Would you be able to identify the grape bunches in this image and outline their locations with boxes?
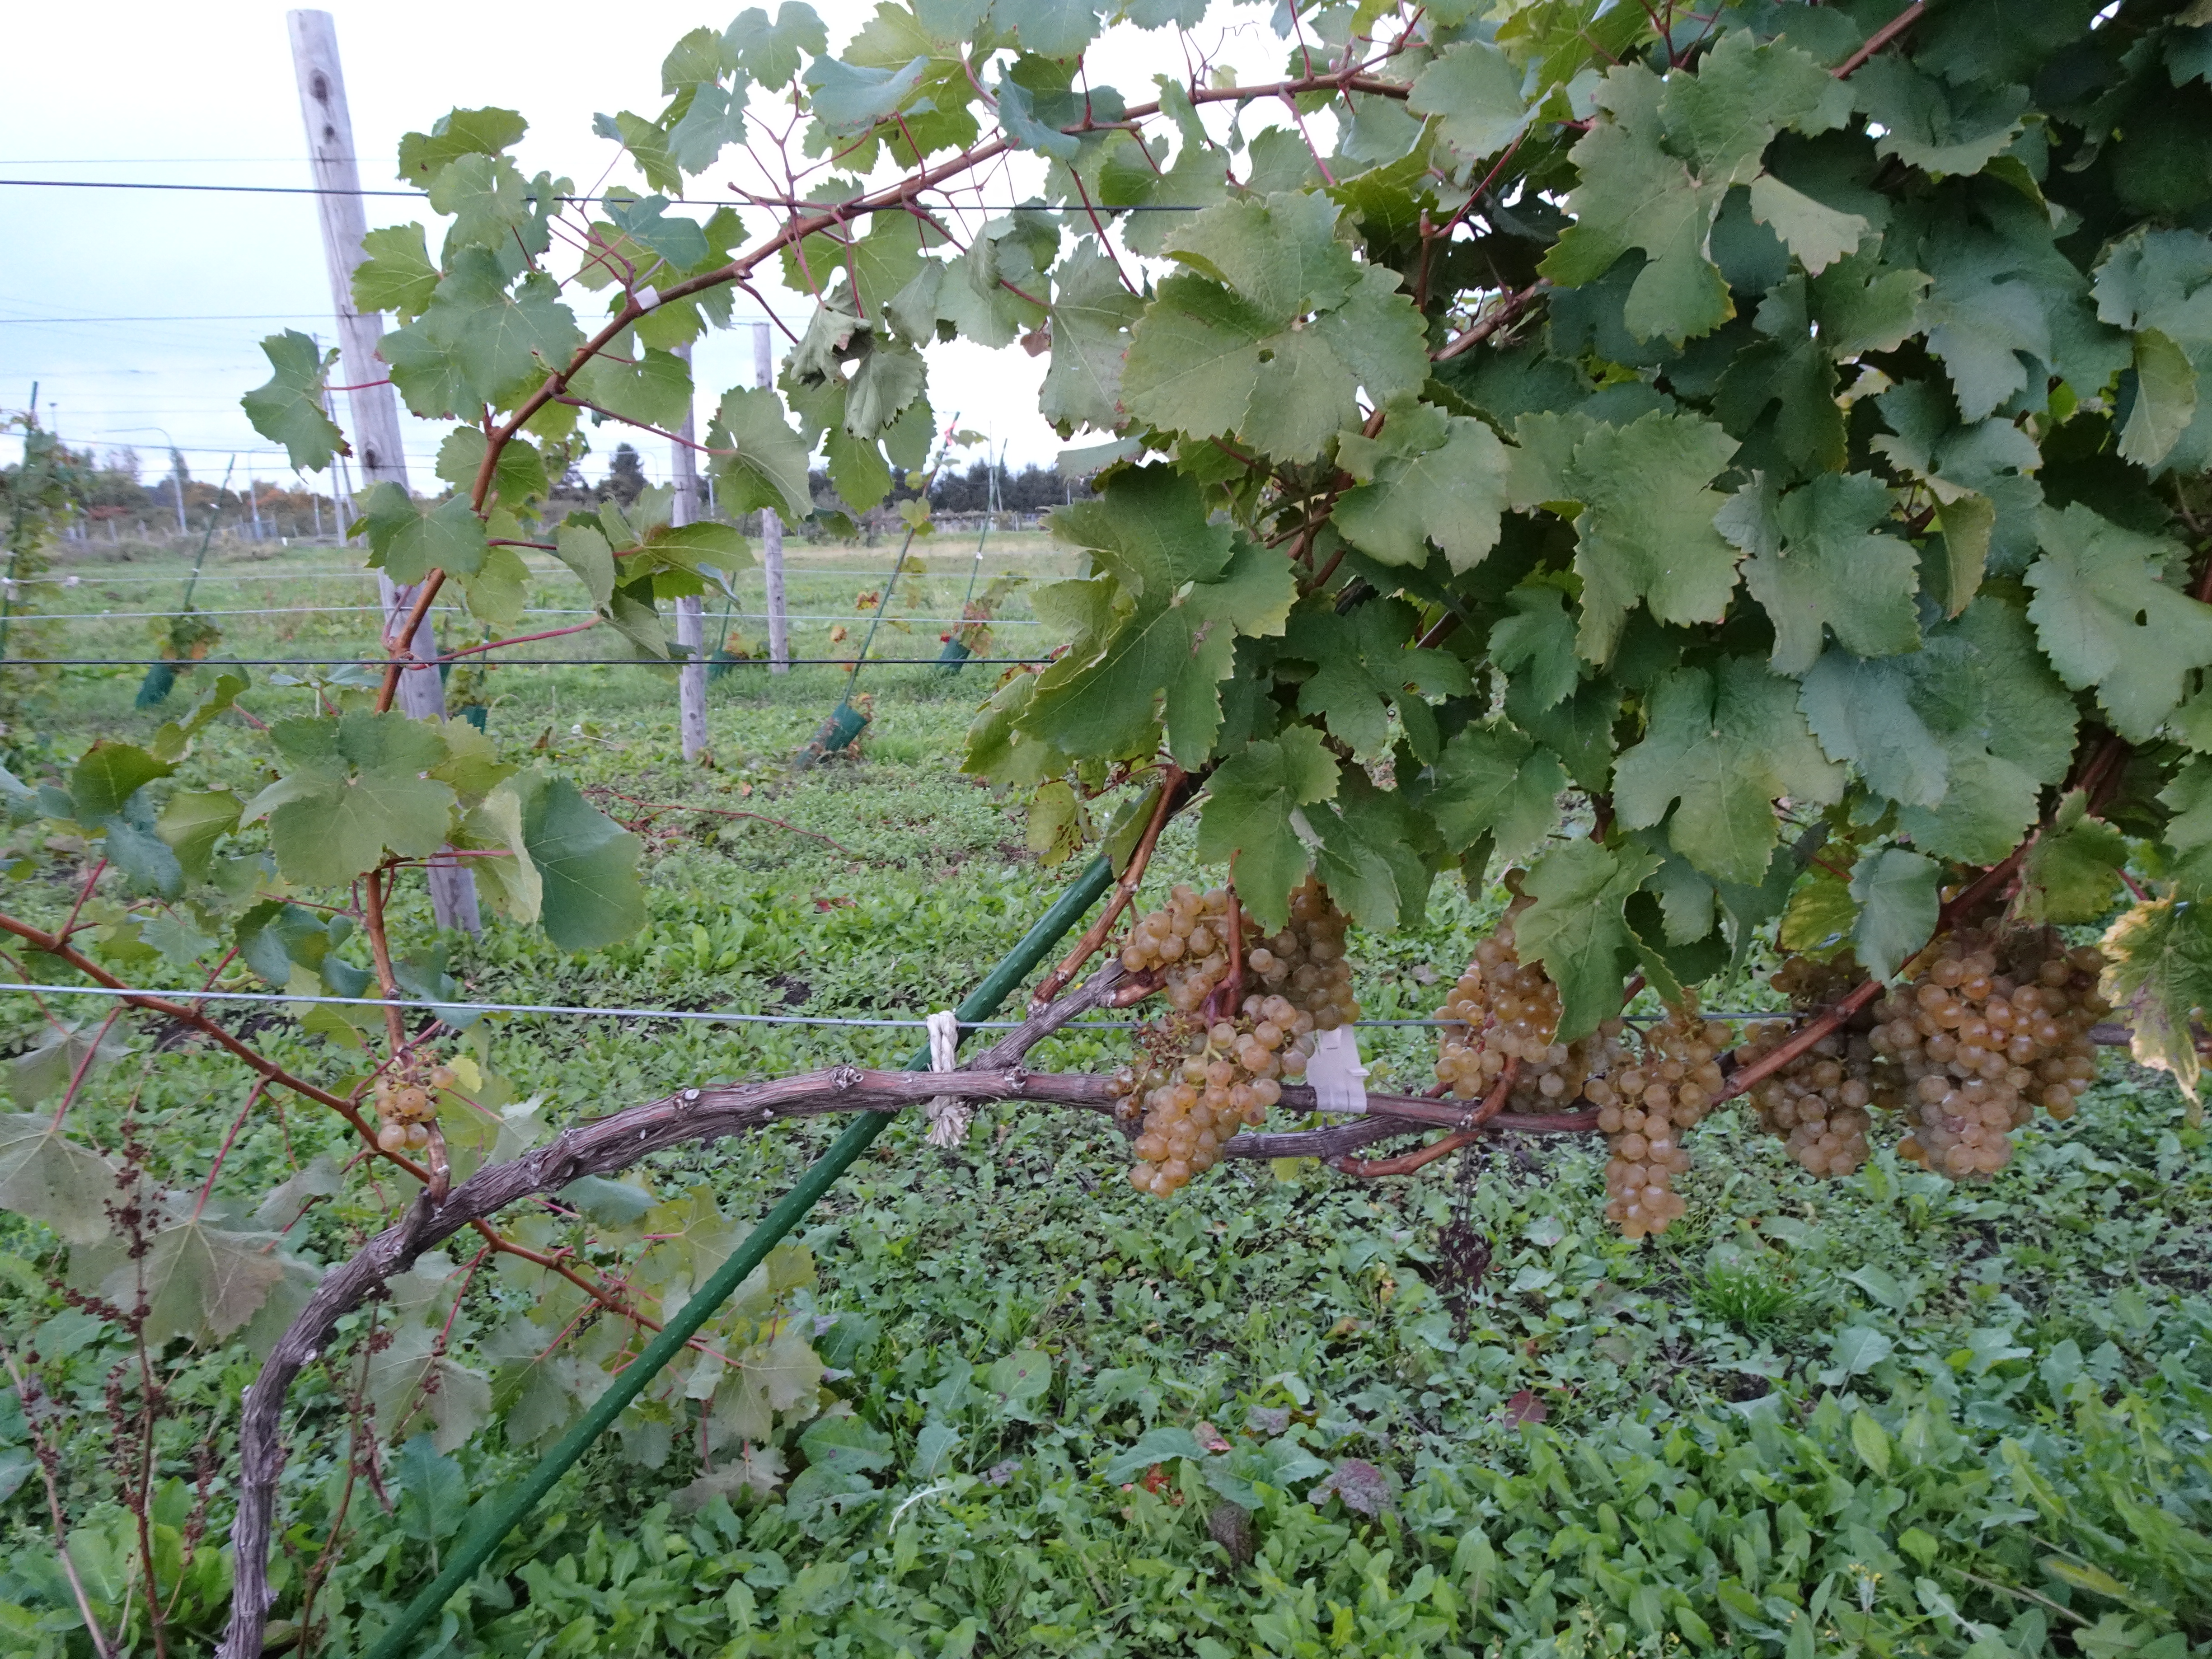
[367,1046,461,1164]
[1642,1006,1736,1128]
[1873,976,1940,1080]
[1128,996,1315,1200]
[1917,920,2015,992]
[1935,865,1980,909]
[1253,869,1358,1042]
[1895,972,2065,1183]
[1754,1061,1878,1178]
[1432,894,1550,1031]
[1585,1072,1691,1239]
[1122,882,1254,1020]
[1765,950,1865,1015]
[1567,1014,1646,1101]
[1106,1044,1160,1120]
[1433,976,1575,1106]
[1816,1025,1907,1102]
[2022,928,2110,1124]
[1733,1017,1807,1065]
[2179,997,2212,1079]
